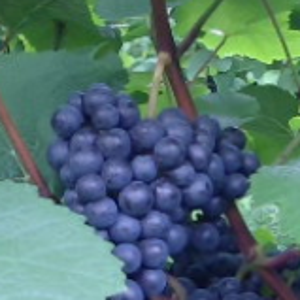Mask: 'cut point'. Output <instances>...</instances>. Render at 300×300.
<instances>
[{
  "mask_svg": "<svg viewBox=\"0 0 300 300\" xmlns=\"http://www.w3.org/2000/svg\"><path fill=\"white\" fill-rule=\"evenodd\" d=\"M158 59L159 62L153 77L149 100V118L153 119H156L157 89L164 73V65L169 61V54L165 51L158 53Z\"/></svg>",
  "mask_w": 300,
  "mask_h": 300,
  "instance_id": "1",
  "label": "cut point"
}]
</instances>
